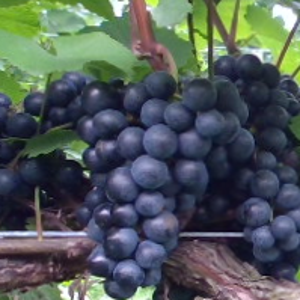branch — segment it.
<instances>
[{"label":"branch","instance_id":"obj_1","mask_svg":"<svg viewBox=\"0 0 300 300\" xmlns=\"http://www.w3.org/2000/svg\"><path fill=\"white\" fill-rule=\"evenodd\" d=\"M130 11L133 15L137 41L133 51L137 60L146 61L148 66L158 73L169 71L163 54L156 51V41L151 29L147 2L143 0H129Z\"/></svg>","mask_w":300,"mask_h":300}]
</instances>
